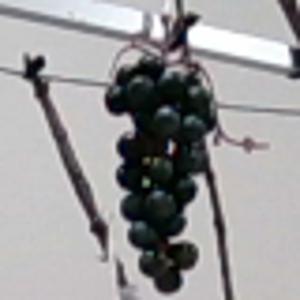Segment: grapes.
Masks as SVG:
<instances>
[{
    "instance_id": "obj_1",
    "label": "grapes",
    "mask_w": 300,
    "mask_h": 300,
    "mask_svg": "<svg viewBox=\"0 0 300 300\" xmlns=\"http://www.w3.org/2000/svg\"><path fill=\"white\" fill-rule=\"evenodd\" d=\"M104 107L114 117L127 114L135 126L115 141L123 159L115 182L127 192L119 213L129 223L128 243L140 251L138 271L159 294L175 296L182 274L196 269L201 257L191 240L170 241L187 227L186 207L199 193L192 177L210 165L206 141L218 123L217 104L199 73L166 69L155 54L118 67Z\"/></svg>"
}]
</instances>
